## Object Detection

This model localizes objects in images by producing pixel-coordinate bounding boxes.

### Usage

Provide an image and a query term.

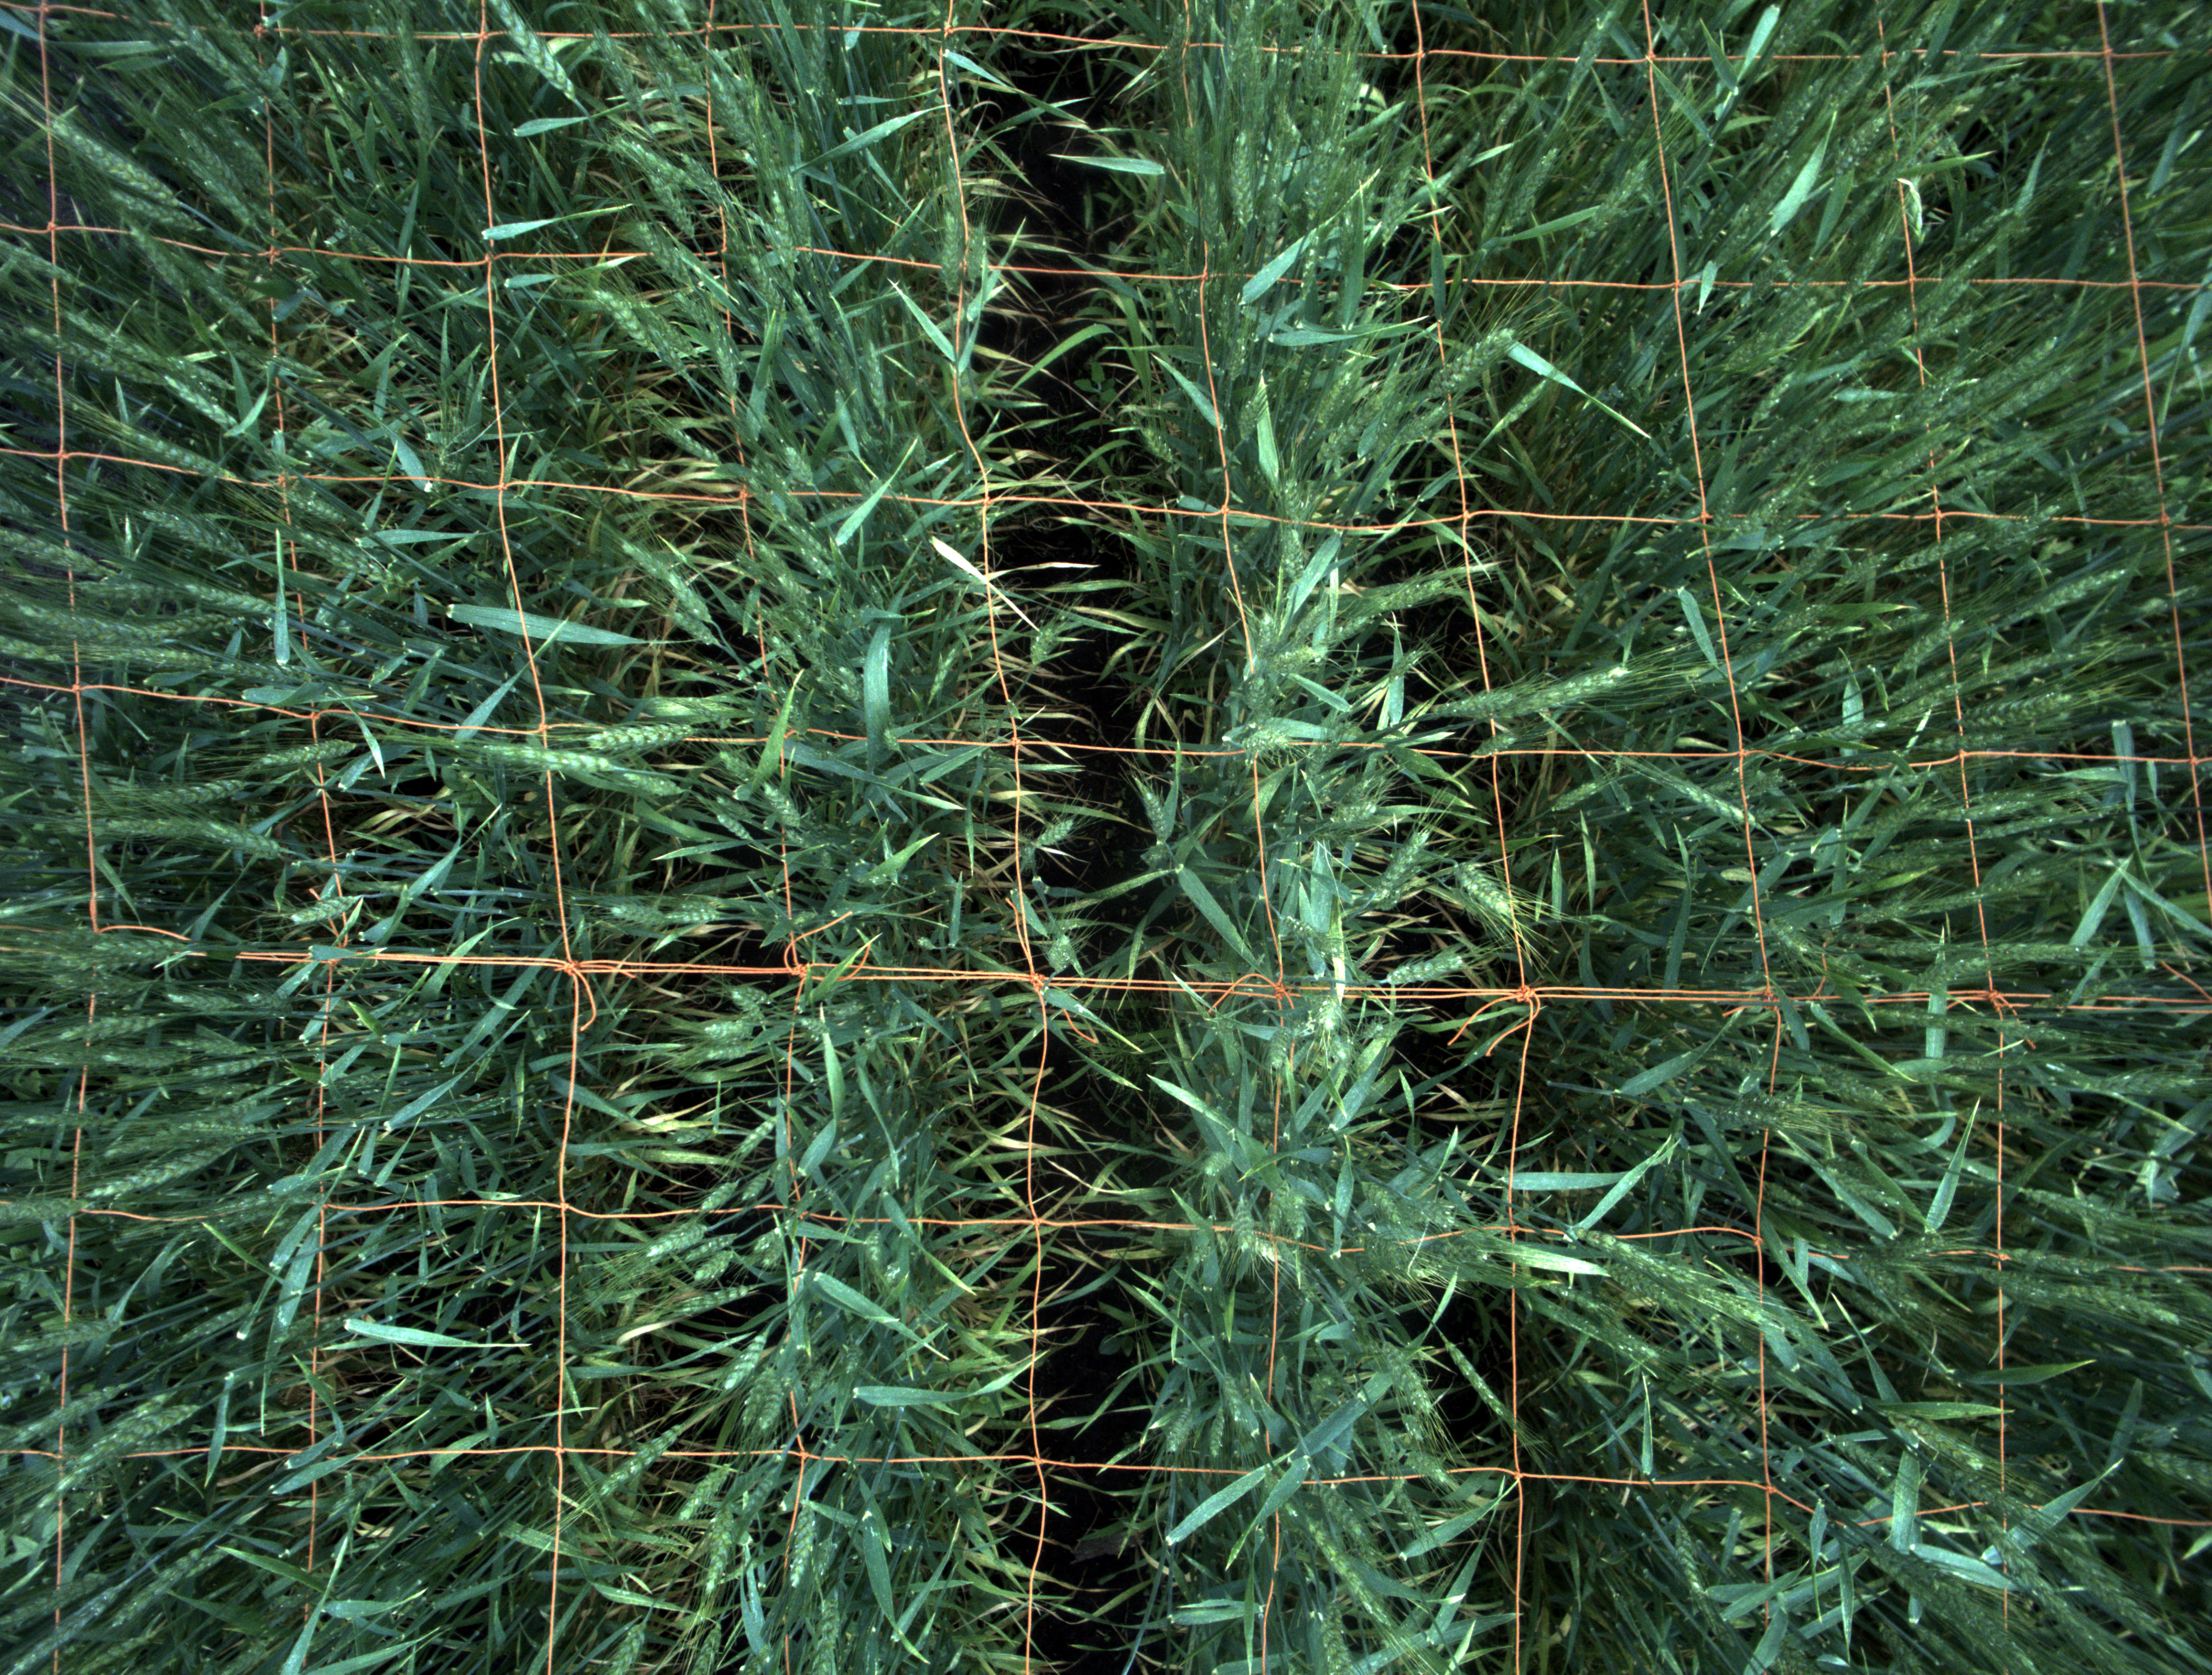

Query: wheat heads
[194,1082,263,1097]
[1601,1324,1661,1360]
[1452,861,1513,918]
[805,1360,829,1389]
[716,814,753,846]
[1839,550,1889,585]
[469,1095,505,1112]
[623,540,713,622]
[223,1636,268,1674]
[103,817,212,840]
[1863,774,1922,792]
[2006,1247,2112,1279]
[1450,130,1481,181]
[1280,480,1304,525]
[1228,132,1255,229]
[737,553,773,591]
[1871,1004,1966,1031]
[1392,413,1432,450]
[1770,603,1825,635]
[828,1000,865,1018]
[1929,335,2059,426]
[134,1436,187,1454]
[1542,381,1560,423]
[1353,1250,1383,1283]
[792,288,822,347]
[1874,0,1943,88]
[1216,294,1232,330]
[1573,1227,1761,1323]
[883,1261,903,1283]
[1772,295,1817,343]
[1937,799,2029,824]
[686,1234,737,1261]
[1261,144,1281,251]
[723,1333,768,1391]
[759,1376,790,1428]
[1904,185,1924,236]
[235,661,311,683]
[1989,942,2082,962]
[1565,8,1615,100]
[1826,43,1885,104]
[730,994,762,1016]
[161,991,241,1014]
[1210,1403,1226,1456]
[1235,14,1258,93]
[898,502,922,524]
[1922,136,1951,165]
[220,1206,280,1226]
[288,1190,329,1207]
[1167,15,1184,52]
[607,1625,645,1672]
[1265,1465,1298,1521]
[595,31,645,111]
[744,1169,771,1199]
[2101,478,2156,514]
[700,1179,741,1213]
[1853,902,1914,926]
[811,1587,842,1671]
[1753,804,1778,821]
[667,427,722,466]
[1274,53,1293,111]
[144,508,235,560]
[708,71,753,142]
[15,1382,129,1443]
[722,797,754,823]
[1993,503,2060,552]
[149,777,249,813]
[1469,734,1516,760]
[1225,0,1255,86]
[271,354,327,380]
[1384,952,1466,986]
[1137,843,1172,871]
[423,1107,467,1119]
[130,225,191,294]
[109,189,209,231]
[1330,69,1361,131]
[1839,806,1917,833]
[1494,665,1631,724]
[1544,1300,1600,1338]
[854,475,873,496]
[118,648,218,672]
[13,1584,123,1671]
[2049,1542,2163,1635]
[786,830,812,851]
[680,152,726,198]
[755,542,787,573]
[1893,530,1978,573]
[1852,1253,1907,1304]
[1822,1430,1891,1479]
[1601,1048,1639,1068]
[336,218,388,256]
[1707,779,1733,795]
[1330,612,1374,645]
[0,488,40,527]
[1918,868,2041,917]
[1607,1262,1681,1314]
[2061,1284,2180,1327]
[74,579,178,604]
[1781,634,1826,664]
[651,329,688,376]
[1236,386,1270,444]
[758,606,824,653]
[397,16,437,145]
[1747,1092,1823,1125]
[1835,107,1951,235]
[10,1319,123,1353]
[645,1225,707,1258]
[740,987,775,1004]
[1402,1450,1451,1484]
[743,1467,776,1516]
[388,321,430,353]
[1315,370,1354,425]
[675,1462,729,1520]
[828,336,853,388]
[178,129,251,200]
[668,911,720,926]
[1771,917,1808,954]
[966,222,987,281]
[677,899,722,912]
[1141,426,1177,465]
[88,1137,239,1196]
[1020,842,1037,873]
[1712,484,1734,534]
[179,1297,252,1340]
[1350,1309,1374,1345]
[1674,1521,1701,1592]
[844,1345,866,1373]
[1721,329,1771,371]
[1973,470,2027,490]
[742,1364,776,1427]
[1892,681,1965,725]
[187,159,253,229]
[599,1421,683,1497]
[65,312,168,366]
[621,771,682,798]
[1313,929,1343,951]
[1396,865,1421,889]
[1916,1069,1965,1087]
[162,1036,261,1058]
[840,666,858,683]
[1305,1370,1336,1392]
[1951,205,2013,252]
[1326,1036,1350,1062]
[273,1590,311,1608]
[646,18,706,83]
[1895,616,1964,679]
[1374,577,1445,615]
[1242,675,1266,709]
[798,640,821,666]
[1276,1,1295,50]
[609,901,668,928]
[799,546,834,582]
[742,1648,771,1672]
[1163,42,1185,98]
[1299,247,1318,297]
[763,777,802,827]
[1982,815,2056,838]
[48,1044,106,1064]
[206,515,248,559]
[917,934,938,951]
[1241,724,1294,756]
[1494,375,1550,435]
[261,740,355,770]
[1393,1484,1423,1528]
[1251,1237,1277,1262]
[742,1114,777,1156]
[1403,1195,1459,1230]
[1974,1266,2049,1303]
[1745,164,1794,228]
[1718,1055,1767,1078]
[1202,1151,1233,1177]
[931,646,956,699]
[1886,668,1947,705]
[591,290,651,350]
[1386,647,1424,685]
[181,1122,260,1137]
[1363,1022,1384,1038]
[1912,1624,1976,1673]
[1343,20,1359,49]
[1445,1341,1504,1418]
[1910,957,1987,991]
[1325,1604,1342,1623]
[23,327,166,384]
[186,1055,271,1082]
[614,139,698,186]
[1678,781,1768,828]
[1871,310,1909,341]
[267,993,294,1017]
[866,1229,882,1268]
[1898,365,1965,425]
[1770,2,1834,62]
[1482,156,1515,225]
[706,1500,737,1597]
[141,616,251,639]
[1315,997,1343,1034]
[1263,1024,1292,1070]
[1501,147,1559,235]
[701,1018,755,1039]
[688,1626,719,1674]
[764,471,808,520]
[2026,568,2122,618]
[1326,800,1378,826]
[163,373,237,431]
[182,257,266,338]
[1777,1639,1823,1674]
[74,1392,171,1472]
[52,119,179,206]
[81,1629,154,1672]
[1765,1180,1807,1208]
[2150,665,2212,712]
[796,1017,829,1035]
[784,448,815,485]
[1432,688,1513,716]
[488,746,620,777]
[703,1042,755,1066]
[1551,779,1600,813]
[839,683,863,708]
[1750,371,1795,435]
[1181,132,1199,175]
[669,611,719,646]
[219,116,270,177]
[793,607,818,629]
[1268,1181,1289,1230]
[790,702,808,734]
[672,290,728,332]
[62,1010,158,1043]
[1722,1104,1786,1132]
[1815,1059,1885,1107]
[2137,1450,2211,1490]
[914,434,929,468]
[1811,657,1852,682]
[1370,828,1430,904]
[1327,12,1341,53]
[1747,256,1786,303]
[384,1005,450,1020]
[1977,651,2077,688]
[1837,933,1883,947]
[1880,1621,1924,1675]
[1978,361,2076,432]
[1913,312,1971,348]
[297,29,347,79]
[1232,1193,1255,1253]
[1878,1535,2014,1651]
[1363,191,1377,212]
[1869,401,1888,422]
[15,1453,91,1534]
[861,339,888,423]
[1942,1052,2026,1073]
[808,1537,839,1579]
[1188,1230,1215,1261]
[1373,1420,1395,1460]
[1701,397,1731,431]
[806,2,829,87]
[939,208,960,292]
[1399,1411,1423,1439]
[290,895,361,923]
[15,601,145,647]
[1542,1282,1600,1314]
[674,1129,720,1147]
[222,1190,274,1211]
[101,1125,204,1159]
[180,585,275,617]
[0,634,65,665]
[1315,1484,1360,1534]
[1269,93,1297,139]
[770,189,795,265]
[1357,1231,1419,1280]
[56,970,150,999]
[1956,692,2073,731]
[1307,1516,1392,1627]
[1206,279,1221,310]
[1382,1342,1431,1415]
[1876,434,1937,485]
[0,527,123,578]
[1429,327,1516,396]
[1254,698,1275,725]
[1421,1242,1490,1266]
[2094,1070,2197,1097]
[1861,854,1936,873]
[1304,53,1326,101]
[675,1284,752,1319]
[49,939,182,970]
[1714,232,1745,265]
[1967,789,2033,806]
[791,1505,815,1585]
[1250,1112,1276,1130]
[1337,219,1356,267]
[1735,484,1794,540]
[165,354,235,391]
[650,173,697,241]
[785,172,816,267]
[1282,529,1308,581]
[1379,167,1412,247]
[667,2,691,29]
[2031,981,2109,1009]
[1313,391,1385,466]
[1965,1106,2038,1132]
[0,1199,96,1224]
[1941,443,2023,480]
[1032,817,1075,847]
[1871,1552,1966,1624]
[113,1402,201,1450]
[1273,644,1319,673]
[1494,68,1545,131]
[1813,718,1890,742]
[1926,734,2004,752]
[203,821,284,859]
[584,723,696,751]
[646,309,698,359]
[1833,401,1865,427]
[1915,256,1975,311]
[0,241,85,290]
[333,1466,389,1510]
[1197,0,1217,33]
[25,1108,121,1130]
[1856,610,1929,639]
[1299,139,1337,219]
[772,636,799,667]
[1861,1114,1910,1145]
[1281,1194,1307,1239]
[1980,1017,2068,1044]
[1377,891,1400,911]
[1280,914,1306,940]
[286,491,349,526]
[15,928,117,945]
[209,1096,255,1123]
[1203,178,1219,238]
[1422,132,1453,164]
[1252,608,1280,655]
[1757,423,1799,461]
[1360,1179,1404,1227]
[1217,1370,1261,1439]
[1942,14,2006,74]
[0,1572,108,1634]
[1336,151,1369,204]
[746,254,783,304]
[1795,535,1836,577]
[1046,932,1073,973]
[120,425,234,481]
[1749,768,1779,798]
[1224,337,1246,379]
[1978,1511,2141,1675]
[692,1247,737,1284]
[880,728,903,755]
[1168,1403,1194,1454]
[497,2,577,99]
[1850,205,1904,291]
[1304,746,1325,778]
[1835,1175,1901,1210]
[1375,416,1400,453]
[1858,136,1903,181]
[1830,1280,1899,1327]
[1849,420,1894,437]
[112,1544,203,1627]
[787,523,831,557]
[300,530,408,590]
[718,750,759,779]
[250,203,302,242]
[1575,159,1648,244]
[429,444,445,500]
[776,571,809,600]
[1764,74,1825,147]
[322,1310,360,1335]
[1885,1231,1943,1257]
[1892,836,1942,852]
[1649,306,1688,346]
[377,834,421,851]
[714,345,739,398]
[1339,778,1371,802]
[273,1313,318,1346]
[205,3,304,120]
[340,1070,386,1089]
[1323,1628,1359,1673]
[1029,615,1066,667]
[98,1052,185,1068]
[1910,1553,1968,1591]
[1136,775,1169,839]
[753,1219,791,1250]
[187,1537,238,1576]
[762,1239,785,1266]
[1946,1471,2035,1522]
[2023,1188,2117,1227]
[634,216,702,292]
[684,700,734,732]
[1825,1153,1873,1179]
[1818,115,1882,176]
[1918,281,1969,326]
[1880,941,1944,957]
[160,3,262,103]
[1878,1409,1985,1472]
